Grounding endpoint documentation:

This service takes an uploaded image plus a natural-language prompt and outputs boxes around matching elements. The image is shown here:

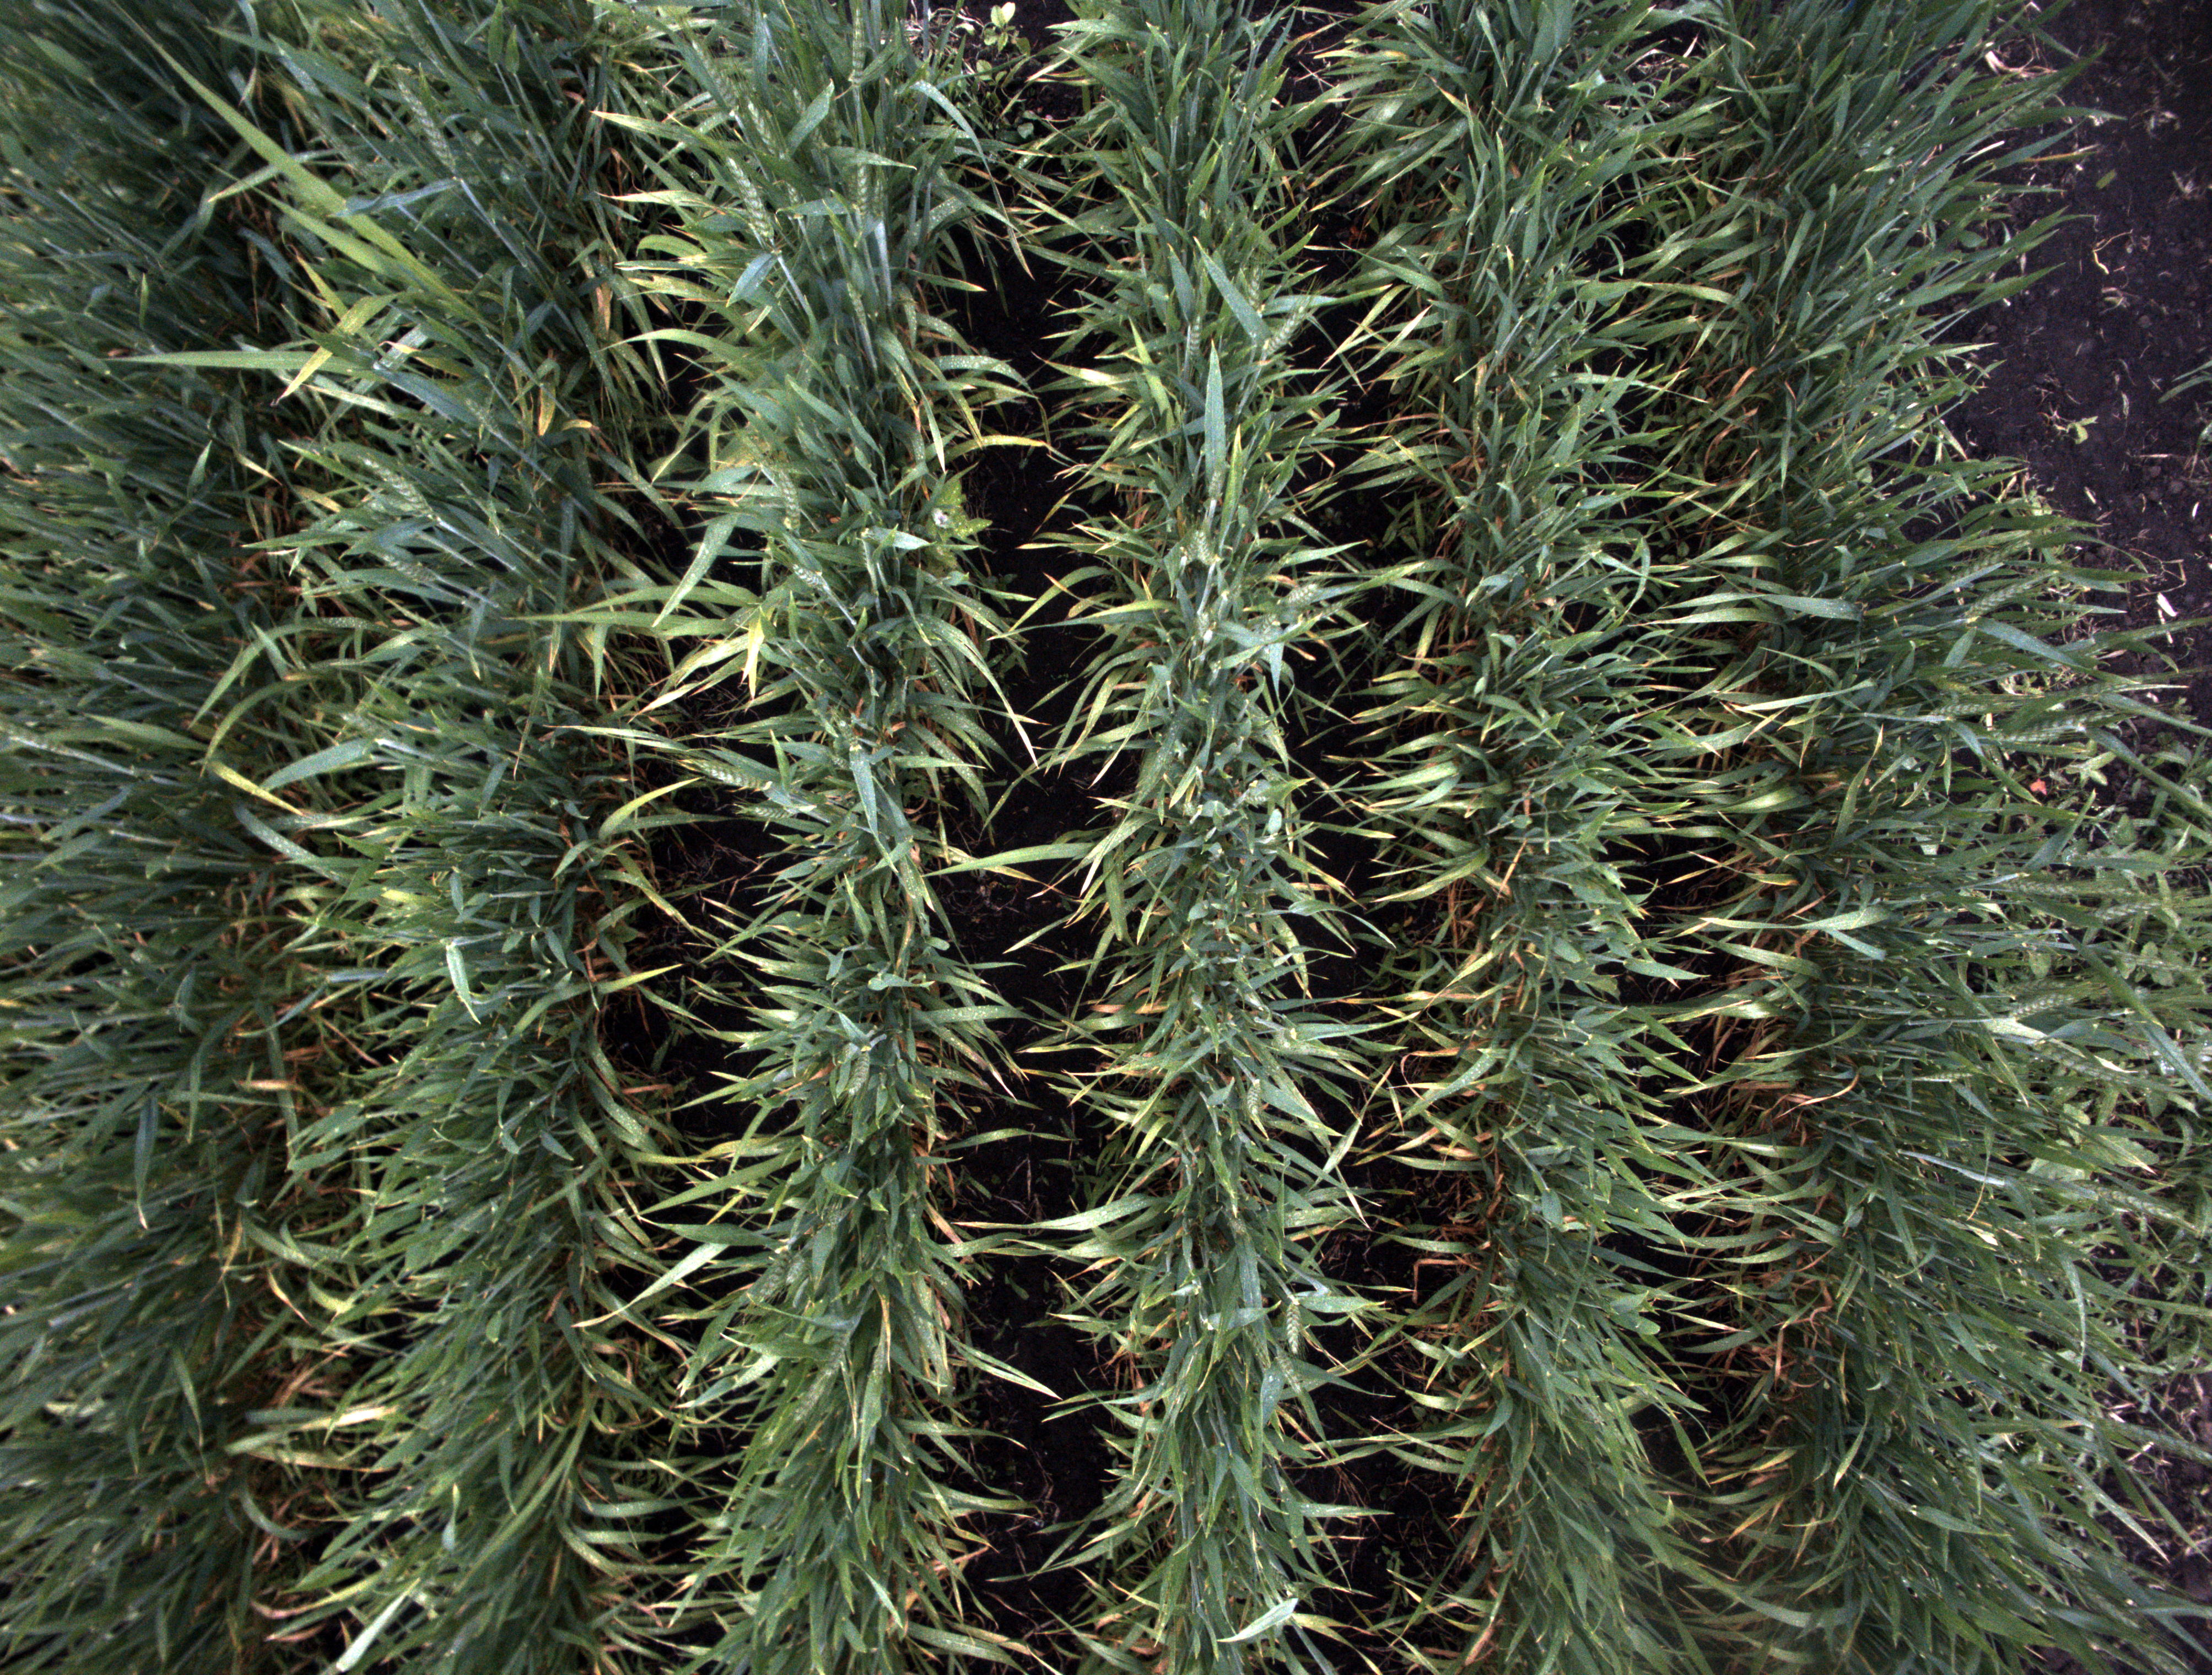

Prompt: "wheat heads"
[2051,1527,2150,1578]
[357,454,436,519]
[1194,527,1213,567]
[2001,979,2067,995]
[699,759,768,789]
[109,739,131,749]
[1245,1084,1263,1117]
[861,539,869,568]
[2009,993,2076,1019]
[791,559,824,585]
[2140,1213,2149,1238]
[1226,583,1242,602]
[450,1616,482,1655]
[828,105,843,145]
[836,718,859,745]
[1964,570,2060,618]
[464,396,502,437]
[2024,1261,2058,1272]
[793,84,826,149]
[2103,946,2183,973]
[2096,1416,2211,1463]
[365,493,418,515]
[1989,72,2072,133]
[827,1210,840,1232]
[1927,704,1986,724]
[337,710,401,741]
[692,37,738,109]
[1268,1562,1297,1593]
[1274,1352,1302,1393]
[403,610,444,630]
[1242,1325,1269,1366]
[2039,1316,2099,1341]
[1188,314,1201,363]
[849,7,867,79]
[1583,540,1603,556]
[793,1375,828,1421]
[847,172,859,204]
[1260,612,1278,635]
[751,805,794,820]
[2072,1182,2173,1223]
[2023,710,2114,733]
[381,910,433,937]
[830,753,850,771]
[871,1343,886,1384]
[1166,1551,1181,1593]
[1301,600,1345,622]
[1273,1034,1338,1059]
[2054,795,2079,810]
[301,105,383,190]
[1285,1302,1300,1353]
[390,0,447,70]
[845,282,867,325]
[1959,541,2031,579]
[1207,470,1223,498]
[856,159,867,220]
[2020,1255,2070,1285]
[1928,672,1970,692]
[871,175,887,218]
[1272,551,1291,574]
[749,98,777,157]
[46,1290,124,1329]
[2141,1644,2193,1675]
[793,426,818,461]
[2007,877,2134,898]
[1267,305,1307,354]
[1247,265,1261,311]
[2132,622,2194,638]
[1228,1217,1247,1234]
[844,1050,870,1096]
[0,717,73,756]
[397,1041,428,1075]
[1260,768,1275,781]
[1916,1071,1972,1082]
[779,151,802,206]
[753,1247,791,1303]
[93,397,135,416]
[741,434,763,461]
[1255,303,1265,317]
[2064,1564,2140,1627]
[2035,1038,2133,1085]
[821,1327,850,1376]
[2047,674,2153,696]
[785,1258,807,1286]
[1983,1131,1993,1155]
[1180,801,1196,816]
[777,466,802,530]
[715,67,744,99]
[1243,795,1267,807]
[724,152,776,239]
[53,110,116,157]
[2101,902,2161,923]
[1994,731,2061,743]
[1196,610,1209,635]
[380,553,437,583]
[397,80,457,173]
[1288,581,1319,612]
